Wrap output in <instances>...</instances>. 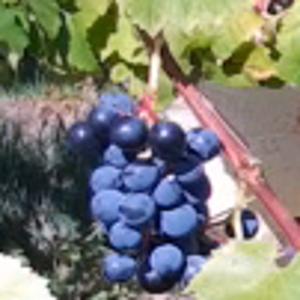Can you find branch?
Masks as SVG:
<instances>
[{"instance_id": "obj_1", "label": "branch", "mask_w": 300, "mask_h": 300, "mask_svg": "<svg viewBox=\"0 0 300 300\" xmlns=\"http://www.w3.org/2000/svg\"><path fill=\"white\" fill-rule=\"evenodd\" d=\"M149 45L151 48L154 46L161 48L160 66L166 77L193 109L203 128L218 138L226 161L237 177L248 185L290 245L300 250V226L283 196L269 181L263 162L248 151L235 126L214 101L193 85L189 77L178 67L166 36L162 33L155 34L150 38Z\"/></svg>"}]
</instances>
